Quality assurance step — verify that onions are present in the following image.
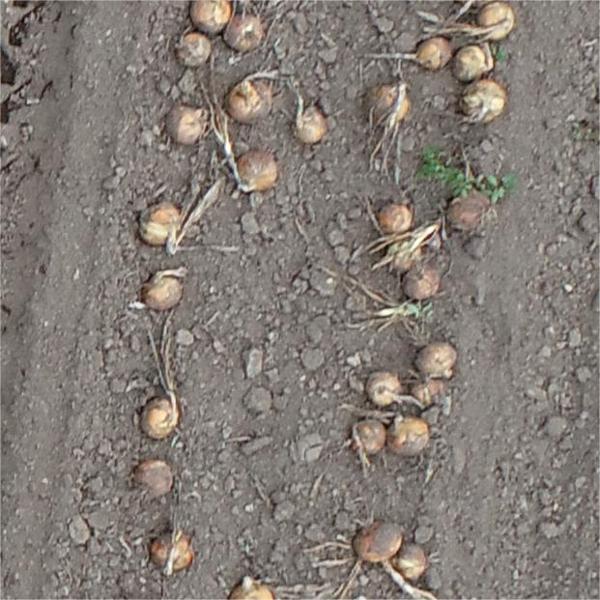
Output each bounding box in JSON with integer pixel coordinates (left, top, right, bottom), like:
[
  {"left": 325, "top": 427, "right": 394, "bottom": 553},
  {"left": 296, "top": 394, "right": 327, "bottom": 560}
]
[
  {"left": 351, "top": 419, "right": 384, "bottom": 458},
  {"left": 375, "top": 202, "right": 409, "bottom": 233},
  {"left": 389, "top": 415, "right": 428, "bottom": 454},
  {"left": 293, "top": 105, "right": 328, "bottom": 142},
  {"left": 415, "top": 340, "right": 454, "bottom": 377},
  {"left": 453, "top": 44, "right": 490, "bottom": 79},
  {"left": 167, "top": 104, "right": 206, "bottom": 145},
  {"left": 413, "top": 377, "right": 442, "bottom": 406},
  {"left": 149, "top": 533, "right": 190, "bottom": 572},
  {"left": 225, "top": 13, "right": 261, "bottom": 51},
  {"left": 460, "top": 79, "right": 504, "bottom": 121},
  {"left": 138, "top": 203, "right": 176, "bottom": 246},
  {"left": 189, "top": 0, "right": 231, "bottom": 36},
  {"left": 475, "top": 3, "right": 514, "bottom": 39},
  {"left": 137, "top": 394, "right": 176, "bottom": 437},
  {"left": 402, "top": 263, "right": 439, "bottom": 298},
  {"left": 356, "top": 519, "right": 402, "bottom": 560},
  {"left": 142, "top": 270, "right": 180, "bottom": 308},
  {"left": 133, "top": 458, "right": 171, "bottom": 497},
  {"left": 415, "top": 35, "right": 449, "bottom": 69},
  {"left": 365, "top": 369, "right": 398, "bottom": 404},
  {"left": 391, "top": 542, "right": 429, "bottom": 579},
  {"left": 447, "top": 194, "right": 492, "bottom": 232},
  {"left": 232, "top": 148, "right": 276, "bottom": 190},
  {"left": 177, "top": 33, "right": 209, "bottom": 64},
  {"left": 225, "top": 76, "right": 270, "bottom": 121},
  {"left": 367, "top": 84, "right": 409, "bottom": 124},
  {"left": 388, "top": 237, "right": 421, "bottom": 270},
  {"left": 231, "top": 577, "right": 273, "bottom": 599}
]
